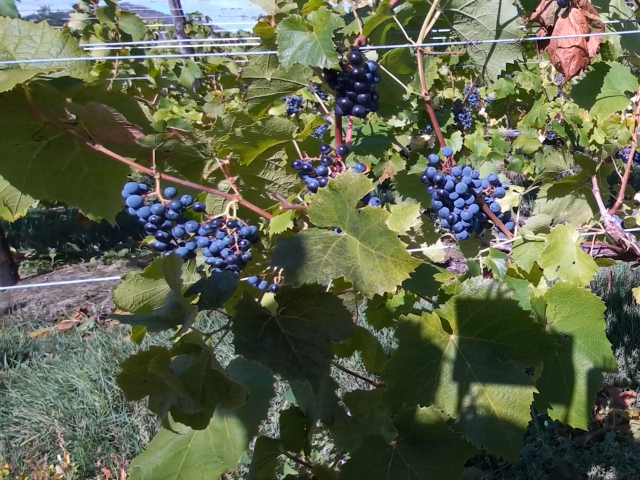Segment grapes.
I'll use <instances>...</instances> for the list:
<instances>
[{"label":"grapes","mask_w":640,"mask_h":480,"mask_svg":"<svg viewBox=\"0 0 640 480\" xmlns=\"http://www.w3.org/2000/svg\"><path fill=\"white\" fill-rule=\"evenodd\" d=\"M427 161L430 165L420 175L419 182L427 185L426 193L431 195V208L437 211L442 228L452 231V235L460 241L468 240L472 232L481 235L484 229H491V219L474 200V195H478L510 232L515 229V222L511 220L512 212H501V205L497 202L506 196L510 185L499 182L500 177L495 172H491L487 179H478L480 172L477 169L453 166L451 175H444L434 167L440 162L437 154H429ZM490 185L496 188L494 196L488 197L483 191Z\"/></svg>","instance_id":"obj_2"},{"label":"grapes","mask_w":640,"mask_h":480,"mask_svg":"<svg viewBox=\"0 0 640 480\" xmlns=\"http://www.w3.org/2000/svg\"><path fill=\"white\" fill-rule=\"evenodd\" d=\"M246 282L250 286L256 287L257 289H266L268 287V291L270 293H275L280 288V285L278 283H274V284L269 286V282L267 280H260V278L258 276H256V275H250L246 279Z\"/></svg>","instance_id":"obj_5"},{"label":"grapes","mask_w":640,"mask_h":480,"mask_svg":"<svg viewBox=\"0 0 640 480\" xmlns=\"http://www.w3.org/2000/svg\"><path fill=\"white\" fill-rule=\"evenodd\" d=\"M377 71L378 64L371 60L364 62L363 71L352 67L348 72L337 74L335 69H322L325 82L336 92L334 112L337 115L365 119L371 111L379 109L380 94L375 90L381 75Z\"/></svg>","instance_id":"obj_3"},{"label":"grapes","mask_w":640,"mask_h":480,"mask_svg":"<svg viewBox=\"0 0 640 480\" xmlns=\"http://www.w3.org/2000/svg\"><path fill=\"white\" fill-rule=\"evenodd\" d=\"M630 152H631V147L630 146H626V147L623 148V150L616 151L615 154H614V158L615 159H622V162L624 164H627L628 161H629Z\"/></svg>","instance_id":"obj_6"},{"label":"grapes","mask_w":640,"mask_h":480,"mask_svg":"<svg viewBox=\"0 0 640 480\" xmlns=\"http://www.w3.org/2000/svg\"><path fill=\"white\" fill-rule=\"evenodd\" d=\"M319 152L323 156L321 157V164H319L315 169L310 161H304L303 159H295L291 163V168L293 170H302L299 173V177L304 180L307 184V188L312 193H316L318 188H324L327 185L328 177L326 175L329 173L328 166L333 164V159L327 156L333 152V147L331 145H321L319 147Z\"/></svg>","instance_id":"obj_4"},{"label":"grapes","mask_w":640,"mask_h":480,"mask_svg":"<svg viewBox=\"0 0 640 480\" xmlns=\"http://www.w3.org/2000/svg\"><path fill=\"white\" fill-rule=\"evenodd\" d=\"M361 202L363 205H369L371 207H379L382 205V200L379 197H370V195L362 197Z\"/></svg>","instance_id":"obj_7"},{"label":"grapes","mask_w":640,"mask_h":480,"mask_svg":"<svg viewBox=\"0 0 640 480\" xmlns=\"http://www.w3.org/2000/svg\"><path fill=\"white\" fill-rule=\"evenodd\" d=\"M148 192V186L144 182L125 183L120 191V196L125 200L127 208L125 212L130 216H135L143 224L144 232L148 236H153L156 240L150 243V247L156 252H162L164 257H169L173 251L179 257L193 259L196 256L195 250L202 247L201 255L205 257L206 265H213L210 272L222 274V270L231 269L232 275H240L241 268L247 262L254 259L251 252H247L251 246L259 241L255 234L258 231L256 225L244 226L239 220L228 221L226 227L229 230L238 229L237 234L241 239L238 242V249L243 254L237 255L235 249L229 248L235 242L232 235L226 234L222 229L223 221L220 218L213 219L210 223L205 222L199 226L196 220H189L184 217L187 207L193 204L195 213L204 214L207 211L204 202L195 201L189 193L179 194L176 186H167L162 190V195L166 199L173 198L167 205L154 203L143 206L144 195ZM184 233H195V241L181 242L179 247L168 243L173 238H182Z\"/></svg>","instance_id":"obj_1"}]
</instances>
